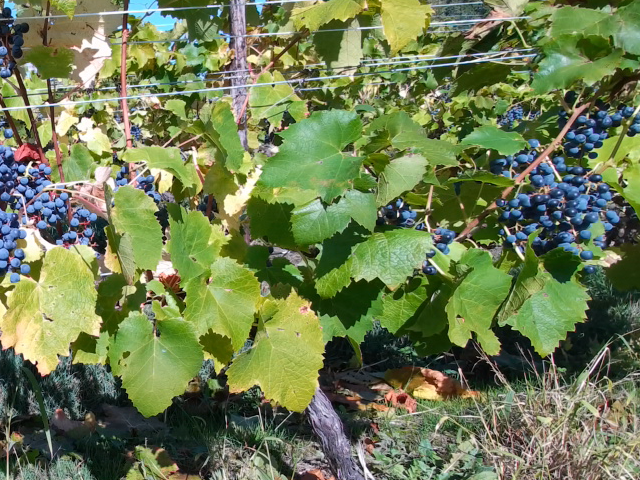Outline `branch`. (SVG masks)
<instances>
[{
  "label": "branch",
  "mask_w": 640,
  "mask_h": 480,
  "mask_svg": "<svg viewBox=\"0 0 640 480\" xmlns=\"http://www.w3.org/2000/svg\"><path fill=\"white\" fill-rule=\"evenodd\" d=\"M55 114H56V108L55 107L50 108V124H51L50 133L53 140V148L55 149V154H56V166L58 169V178L61 183H64L65 178H64V171L61 163V151H60V146L58 145V138L55 130L56 128Z\"/></svg>",
  "instance_id": "branch-2"
},
{
  "label": "branch",
  "mask_w": 640,
  "mask_h": 480,
  "mask_svg": "<svg viewBox=\"0 0 640 480\" xmlns=\"http://www.w3.org/2000/svg\"><path fill=\"white\" fill-rule=\"evenodd\" d=\"M605 91L604 87H600L594 95L587 99L584 103H582L577 109H574L570 116L568 117L565 125L561 128L558 134L554 137L552 142L541 152L539 156L531 161L528 167L521 172L517 177L516 181L521 183L524 179H526L534 170L537 165L542 163L548 155L557 147V145L561 142L563 137L568 133L574 124L576 118L579 114H582L586 109H588L597 99L598 97Z\"/></svg>",
  "instance_id": "branch-1"
},
{
  "label": "branch",
  "mask_w": 640,
  "mask_h": 480,
  "mask_svg": "<svg viewBox=\"0 0 640 480\" xmlns=\"http://www.w3.org/2000/svg\"><path fill=\"white\" fill-rule=\"evenodd\" d=\"M14 76H15V78L17 80V83L19 84L20 97L23 99L24 105H29L28 94L25 91V85L23 84V80H22L21 75L19 74V69L18 68L14 69Z\"/></svg>",
  "instance_id": "branch-7"
},
{
  "label": "branch",
  "mask_w": 640,
  "mask_h": 480,
  "mask_svg": "<svg viewBox=\"0 0 640 480\" xmlns=\"http://www.w3.org/2000/svg\"><path fill=\"white\" fill-rule=\"evenodd\" d=\"M49 29V20H44V26L41 30V35L43 37L42 45L46 46L48 44V34L47 31Z\"/></svg>",
  "instance_id": "branch-10"
},
{
  "label": "branch",
  "mask_w": 640,
  "mask_h": 480,
  "mask_svg": "<svg viewBox=\"0 0 640 480\" xmlns=\"http://www.w3.org/2000/svg\"><path fill=\"white\" fill-rule=\"evenodd\" d=\"M2 44H3V46H6V47L8 48V55L6 56V57H7V59H8V61H9V60H12V61H14V62H15V65H16V64H17V61H16V59H15V58H13V56H12V54H11V47H10V45L8 44V42H7V39H6V38H3V39H2Z\"/></svg>",
  "instance_id": "branch-11"
},
{
  "label": "branch",
  "mask_w": 640,
  "mask_h": 480,
  "mask_svg": "<svg viewBox=\"0 0 640 480\" xmlns=\"http://www.w3.org/2000/svg\"><path fill=\"white\" fill-rule=\"evenodd\" d=\"M248 101H249V96L245 95L244 99H243V101H242V103L240 105V109L237 112L236 121H235L236 125H240L241 124V118H242V115H243V113L245 111V108L247 106Z\"/></svg>",
  "instance_id": "branch-9"
},
{
  "label": "branch",
  "mask_w": 640,
  "mask_h": 480,
  "mask_svg": "<svg viewBox=\"0 0 640 480\" xmlns=\"http://www.w3.org/2000/svg\"><path fill=\"white\" fill-rule=\"evenodd\" d=\"M121 108H122V120H123L124 137L126 140V146L128 148H131L133 146V138L131 135L129 106H128L127 100L121 101Z\"/></svg>",
  "instance_id": "branch-3"
},
{
  "label": "branch",
  "mask_w": 640,
  "mask_h": 480,
  "mask_svg": "<svg viewBox=\"0 0 640 480\" xmlns=\"http://www.w3.org/2000/svg\"><path fill=\"white\" fill-rule=\"evenodd\" d=\"M497 208H498V205L496 203H493L490 206H488L480 215H478L470 224H468L461 231V234L463 236H467L471 231H473L483 220H485Z\"/></svg>",
  "instance_id": "branch-4"
},
{
  "label": "branch",
  "mask_w": 640,
  "mask_h": 480,
  "mask_svg": "<svg viewBox=\"0 0 640 480\" xmlns=\"http://www.w3.org/2000/svg\"><path fill=\"white\" fill-rule=\"evenodd\" d=\"M4 115L6 116L8 122H9V126L12 129V133H13L14 138L16 139L17 144L19 146H22L23 145V141H22L21 137L19 136V133H18L17 127H16V125L14 123L12 115L10 114V112H4Z\"/></svg>",
  "instance_id": "branch-8"
},
{
  "label": "branch",
  "mask_w": 640,
  "mask_h": 480,
  "mask_svg": "<svg viewBox=\"0 0 640 480\" xmlns=\"http://www.w3.org/2000/svg\"><path fill=\"white\" fill-rule=\"evenodd\" d=\"M308 31H309L308 29H305V30H304V31H303V32H302V33H301V34H300V35H299V36H298V37H297V38H296V39H295L291 44H289L287 47H285L284 49H282V51L279 53V55H278L276 58H274V59L272 60V62H271V63H269V64H268V65H267L263 70H261V71L257 74L256 78L253 80V82H252V83H253V84H254V83H256V82H257L258 77L260 76V74H261V73H263V72H265V71L270 70V69L272 68V64H273L276 60H278V59H279V58H280V57H281V56H282L286 51H288L290 48H292V46L294 45V43H295L297 40H299L301 37H303V36H304Z\"/></svg>",
  "instance_id": "branch-6"
},
{
  "label": "branch",
  "mask_w": 640,
  "mask_h": 480,
  "mask_svg": "<svg viewBox=\"0 0 640 480\" xmlns=\"http://www.w3.org/2000/svg\"><path fill=\"white\" fill-rule=\"evenodd\" d=\"M27 114L29 117V120L31 122V126L34 132V137H35V142H36V150L38 152V155L40 157V159L43 161V164L48 165L49 161L47 160L43 150H42V143H41V139H40V134H39V129L37 127L36 124V120L34 118L33 112L32 110H27Z\"/></svg>",
  "instance_id": "branch-5"
}]
</instances>
